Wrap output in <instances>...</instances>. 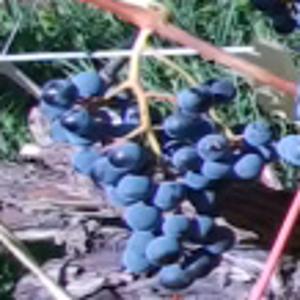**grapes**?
<instances>
[{"label":"grapes","mask_w":300,"mask_h":300,"mask_svg":"<svg viewBox=\"0 0 300 300\" xmlns=\"http://www.w3.org/2000/svg\"><path fill=\"white\" fill-rule=\"evenodd\" d=\"M105 90L106 80L96 71L44 81L41 110L53 122L51 135L78 146L75 172L96 187H110L111 203L124 208L132 232L121 250L123 270H160L165 288H189L214 274L235 243L234 230L214 222L222 195L212 183L253 180L274 155L300 166V134L274 140L273 124L254 119L240 132L242 151L233 153L205 116L235 97L233 85L221 78L179 88L177 111L147 122L135 100L121 104V123L115 125L109 112L87 108L86 99H98Z\"/></svg>","instance_id":"1"}]
</instances>
